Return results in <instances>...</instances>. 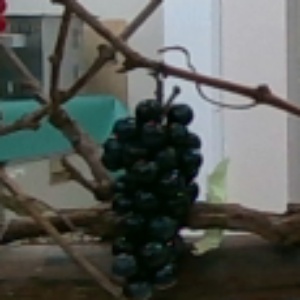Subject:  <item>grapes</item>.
<instances>
[{
	"label": "grapes",
	"instance_id": "1",
	"mask_svg": "<svg viewBox=\"0 0 300 300\" xmlns=\"http://www.w3.org/2000/svg\"><path fill=\"white\" fill-rule=\"evenodd\" d=\"M195 119L188 104L139 101L134 116L116 119L112 136L99 145L101 166L123 174L110 183L113 226L110 275L124 282L128 300H149L154 288L172 289L179 279L187 244L179 234L198 199L194 179L203 162L202 137L187 125Z\"/></svg>",
	"mask_w": 300,
	"mask_h": 300
}]
</instances>
